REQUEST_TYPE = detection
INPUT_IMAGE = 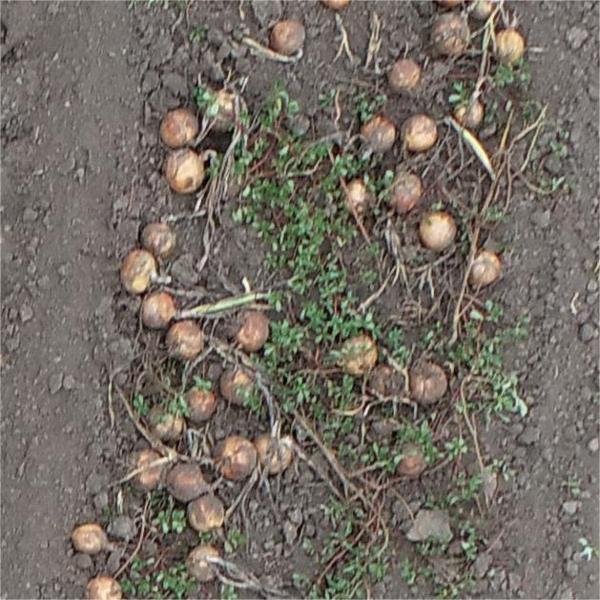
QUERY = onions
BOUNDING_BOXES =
[234,311,267,349]
[338,334,376,374]
[386,57,422,92]
[466,250,501,285]
[340,177,373,215]
[161,152,202,192]
[492,28,525,61]
[396,449,424,476]
[258,436,292,470]
[159,108,198,146]
[85,572,120,599]
[366,363,403,400]
[429,16,468,56]
[140,289,175,326]
[268,19,302,53]
[140,220,174,257]
[386,171,423,212]
[119,249,157,292]
[181,384,215,421]
[214,436,256,480]
[399,114,436,151]
[168,462,207,500]
[70,522,104,554]
[437,0,468,10]
[467,0,495,26]
[360,115,396,151]
[136,448,167,485]
[408,362,444,402]
[455,101,483,127]
[319,0,350,11]
[419,208,455,247]
[184,494,223,532]
[165,320,202,358]
[218,365,255,403]
[184,543,221,580]
[206,93,247,133]
[151,404,183,441]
